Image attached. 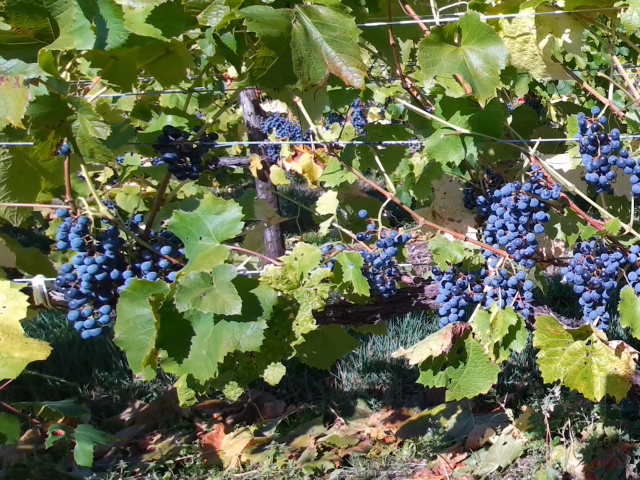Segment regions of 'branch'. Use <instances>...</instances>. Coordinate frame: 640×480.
<instances>
[{
    "mask_svg": "<svg viewBox=\"0 0 640 480\" xmlns=\"http://www.w3.org/2000/svg\"><path fill=\"white\" fill-rule=\"evenodd\" d=\"M562 199H563V200H564L568 205H570L574 210H576V211L580 214V216H581V217H582V218H583V219H584L588 224H590L591 226H593L594 228H596V229H598V230H600V231H603V230H604V227H603L601 224H598V223H597V222H595L593 219H591V218H590V217H589V216L584 212V210H583L580 206H578V205H577V204H575L572 200H570V199L567 197V194H566V193H563V194H562Z\"/></svg>",
    "mask_w": 640,
    "mask_h": 480,
    "instance_id": "ea751061",
    "label": "branch"
},
{
    "mask_svg": "<svg viewBox=\"0 0 640 480\" xmlns=\"http://www.w3.org/2000/svg\"><path fill=\"white\" fill-rule=\"evenodd\" d=\"M402 6L404 7L405 11L407 12V15L409 18L411 19H419V15L417 14V10L411 5L408 4L406 1L402 2Z\"/></svg>",
    "mask_w": 640,
    "mask_h": 480,
    "instance_id": "1d269e1b",
    "label": "branch"
},
{
    "mask_svg": "<svg viewBox=\"0 0 640 480\" xmlns=\"http://www.w3.org/2000/svg\"><path fill=\"white\" fill-rule=\"evenodd\" d=\"M517 145L520 146L525 151L524 156L526 157L527 160L532 161L539 166V168L542 170L546 180L550 185L554 184V180L551 177L552 175L555 178L563 181L569 187H571L577 194H579L582 198H584L587 202H589L594 208L601 211L602 213L607 215L609 218L615 217L614 213H612L611 211H609L608 209L604 208L603 206L598 204L596 201H594L590 196H588L584 191L578 188V186L575 185L573 182H571L568 178L561 175L560 173H558L557 171L549 167L547 164H545L540 159L539 154L536 151L532 150L525 143H517Z\"/></svg>",
    "mask_w": 640,
    "mask_h": 480,
    "instance_id": "170604dd",
    "label": "branch"
},
{
    "mask_svg": "<svg viewBox=\"0 0 640 480\" xmlns=\"http://www.w3.org/2000/svg\"><path fill=\"white\" fill-rule=\"evenodd\" d=\"M292 99L295 100L298 103L299 110L304 115L306 121L309 122L310 127L312 128V130L314 132V135L316 136L318 141H323V136L320 134V132H319L314 120L311 118V116L309 115L308 111L304 108L303 100L300 97H298L297 95H293Z\"/></svg>",
    "mask_w": 640,
    "mask_h": 480,
    "instance_id": "ca6c30ca",
    "label": "branch"
},
{
    "mask_svg": "<svg viewBox=\"0 0 640 480\" xmlns=\"http://www.w3.org/2000/svg\"><path fill=\"white\" fill-rule=\"evenodd\" d=\"M388 35H389V40H390V43H391V48H392L393 53L395 55V60H396L397 68H398V73L400 75V78L402 79L403 88L410 95V97L414 99V101L417 103V105L420 106L422 111L424 113H428L429 109L421 101V99L414 93V91L411 90L410 87L408 86L407 77L405 75V72L403 71L402 61H401V58H400V53H399L398 48L396 46V41H395V37H394V33H393V25H388Z\"/></svg>",
    "mask_w": 640,
    "mask_h": 480,
    "instance_id": "982ccf7c",
    "label": "branch"
},
{
    "mask_svg": "<svg viewBox=\"0 0 640 480\" xmlns=\"http://www.w3.org/2000/svg\"><path fill=\"white\" fill-rule=\"evenodd\" d=\"M621 227H622L625 231L630 232L633 236H635V237H637V238H640V233H639V232H637L634 228L627 226L625 223H622V224H621Z\"/></svg>",
    "mask_w": 640,
    "mask_h": 480,
    "instance_id": "2b1400db",
    "label": "branch"
},
{
    "mask_svg": "<svg viewBox=\"0 0 640 480\" xmlns=\"http://www.w3.org/2000/svg\"><path fill=\"white\" fill-rule=\"evenodd\" d=\"M324 148L339 164H341L344 167L348 168L354 175L358 176L363 182H365L366 184H368L369 186H371L375 190H378L379 192H381L385 196L389 197L403 211H405L408 214L412 215V217L416 221H419L420 223H423L425 225L431 226L433 228H437L441 232H444L446 234H450V235L455 236L457 238H460V239H462L464 241H468L471 244H474V245L479 246L481 248H485V249H487V250H489V251H491L493 253H496L498 255H501V256H503L505 258L509 257V253L508 252H505L503 250L495 248L494 246H491L488 243H484V242L478 241V240L472 238L471 236H466L463 233H459V232H457V231H455L453 229L446 228V227L442 226L441 224H437L436 222H433L431 220L425 219L419 212H417L415 210H412L411 208H409L405 204H403L394 194H392L391 192L387 191L382 186L376 184L375 182H373L369 178L365 177L362 174L361 171H358L350 163L346 162L344 159L339 157V155L334 150H332V148L330 146H324Z\"/></svg>",
    "mask_w": 640,
    "mask_h": 480,
    "instance_id": "325d2c04",
    "label": "branch"
},
{
    "mask_svg": "<svg viewBox=\"0 0 640 480\" xmlns=\"http://www.w3.org/2000/svg\"><path fill=\"white\" fill-rule=\"evenodd\" d=\"M164 257L166 259H168L170 262H172L173 264H175L176 266H178V267H181V268L185 267V263L184 262H181V261L177 260L176 258L171 256L170 254L164 255Z\"/></svg>",
    "mask_w": 640,
    "mask_h": 480,
    "instance_id": "1af6ec82",
    "label": "branch"
},
{
    "mask_svg": "<svg viewBox=\"0 0 640 480\" xmlns=\"http://www.w3.org/2000/svg\"><path fill=\"white\" fill-rule=\"evenodd\" d=\"M68 136H69L71 144L74 147L76 155H77V157H78V159L80 161L83 177L85 178L86 183L88 184V188L91 189L92 195H93V197H94V199L97 202V205L99 207V211L102 213L104 218L107 221H110V222L114 223L122 232H124L127 235H129L132 239H134L136 242L140 243L146 249H150L152 252H154L157 255L161 256L159 252L154 251L152 249V245L147 243V241H148V234H149L150 227H151V225L153 223V220H154V218L156 216V213H157V211H158V209L160 207V203H161V200L163 198L164 191H166L167 188H168V184H169V181H170V178H171V174L170 173H166L164 175L163 179H162V183L160 185L159 192H158L155 204H154V206H153V208L151 210L149 218H148V220L146 222V225L144 227L143 239H142L141 237L137 236L134 232L129 230L127 227H125L123 224H121V222L117 218H114V217L110 216L108 214V212L105 210L103 202L100 199V196H99V194H98V192L96 190V187L94 186V184H93V182H92V180H91V178H90V176L88 174L85 159H84V157H83V155L81 153V150H80V147H79L78 143L75 140L74 133L73 132H69Z\"/></svg>",
    "mask_w": 640,
    "mask_h": 480,
    "instance_id": "30e6481e",
    "label": "branch"
},
{
    "mask_svg": "<svg viewBox=\"0 0 640 480\" xmlns=\"http://www.w3.org/2000/svg\"><path fill=\"white\" fill-rule=\"evenodd\" d=\"M63 168H64L65 196L71 206L72 213L77 214L78 210L76 207V203L71 197V193H70L71 171H70V155L69 154H66L64 156Z\"/></svg>",
    "mask_w": 640,
    "mask_h": 480,
    "instance_id": "1ff4a987",
    "label": "branch"
},
{
    "mask_svg": "<svg viewBox=\"0 0 640 480\" xmlns=\"http://www.w3.org/2000/svg\"><path fill=\"white\" fill-rule=\"evenodd\" d=\"M561 69L572 79L575 80L582 88L590 91L595 97L596 99L604 104L613 114H615L620 120H625L626 119V115L622 112V110L615 105L613 102H611L606 96H603L600 92H598L595 88H593L592 86L586 84L582 79H580L577 75H575L573 72H571L565 63L561 64Z\"/></svg>",
    "mask_w": 640,
    "mask_h": 480,
    "instance_id": "45aa463d",
    "label": "branch"
}]
</instances>
